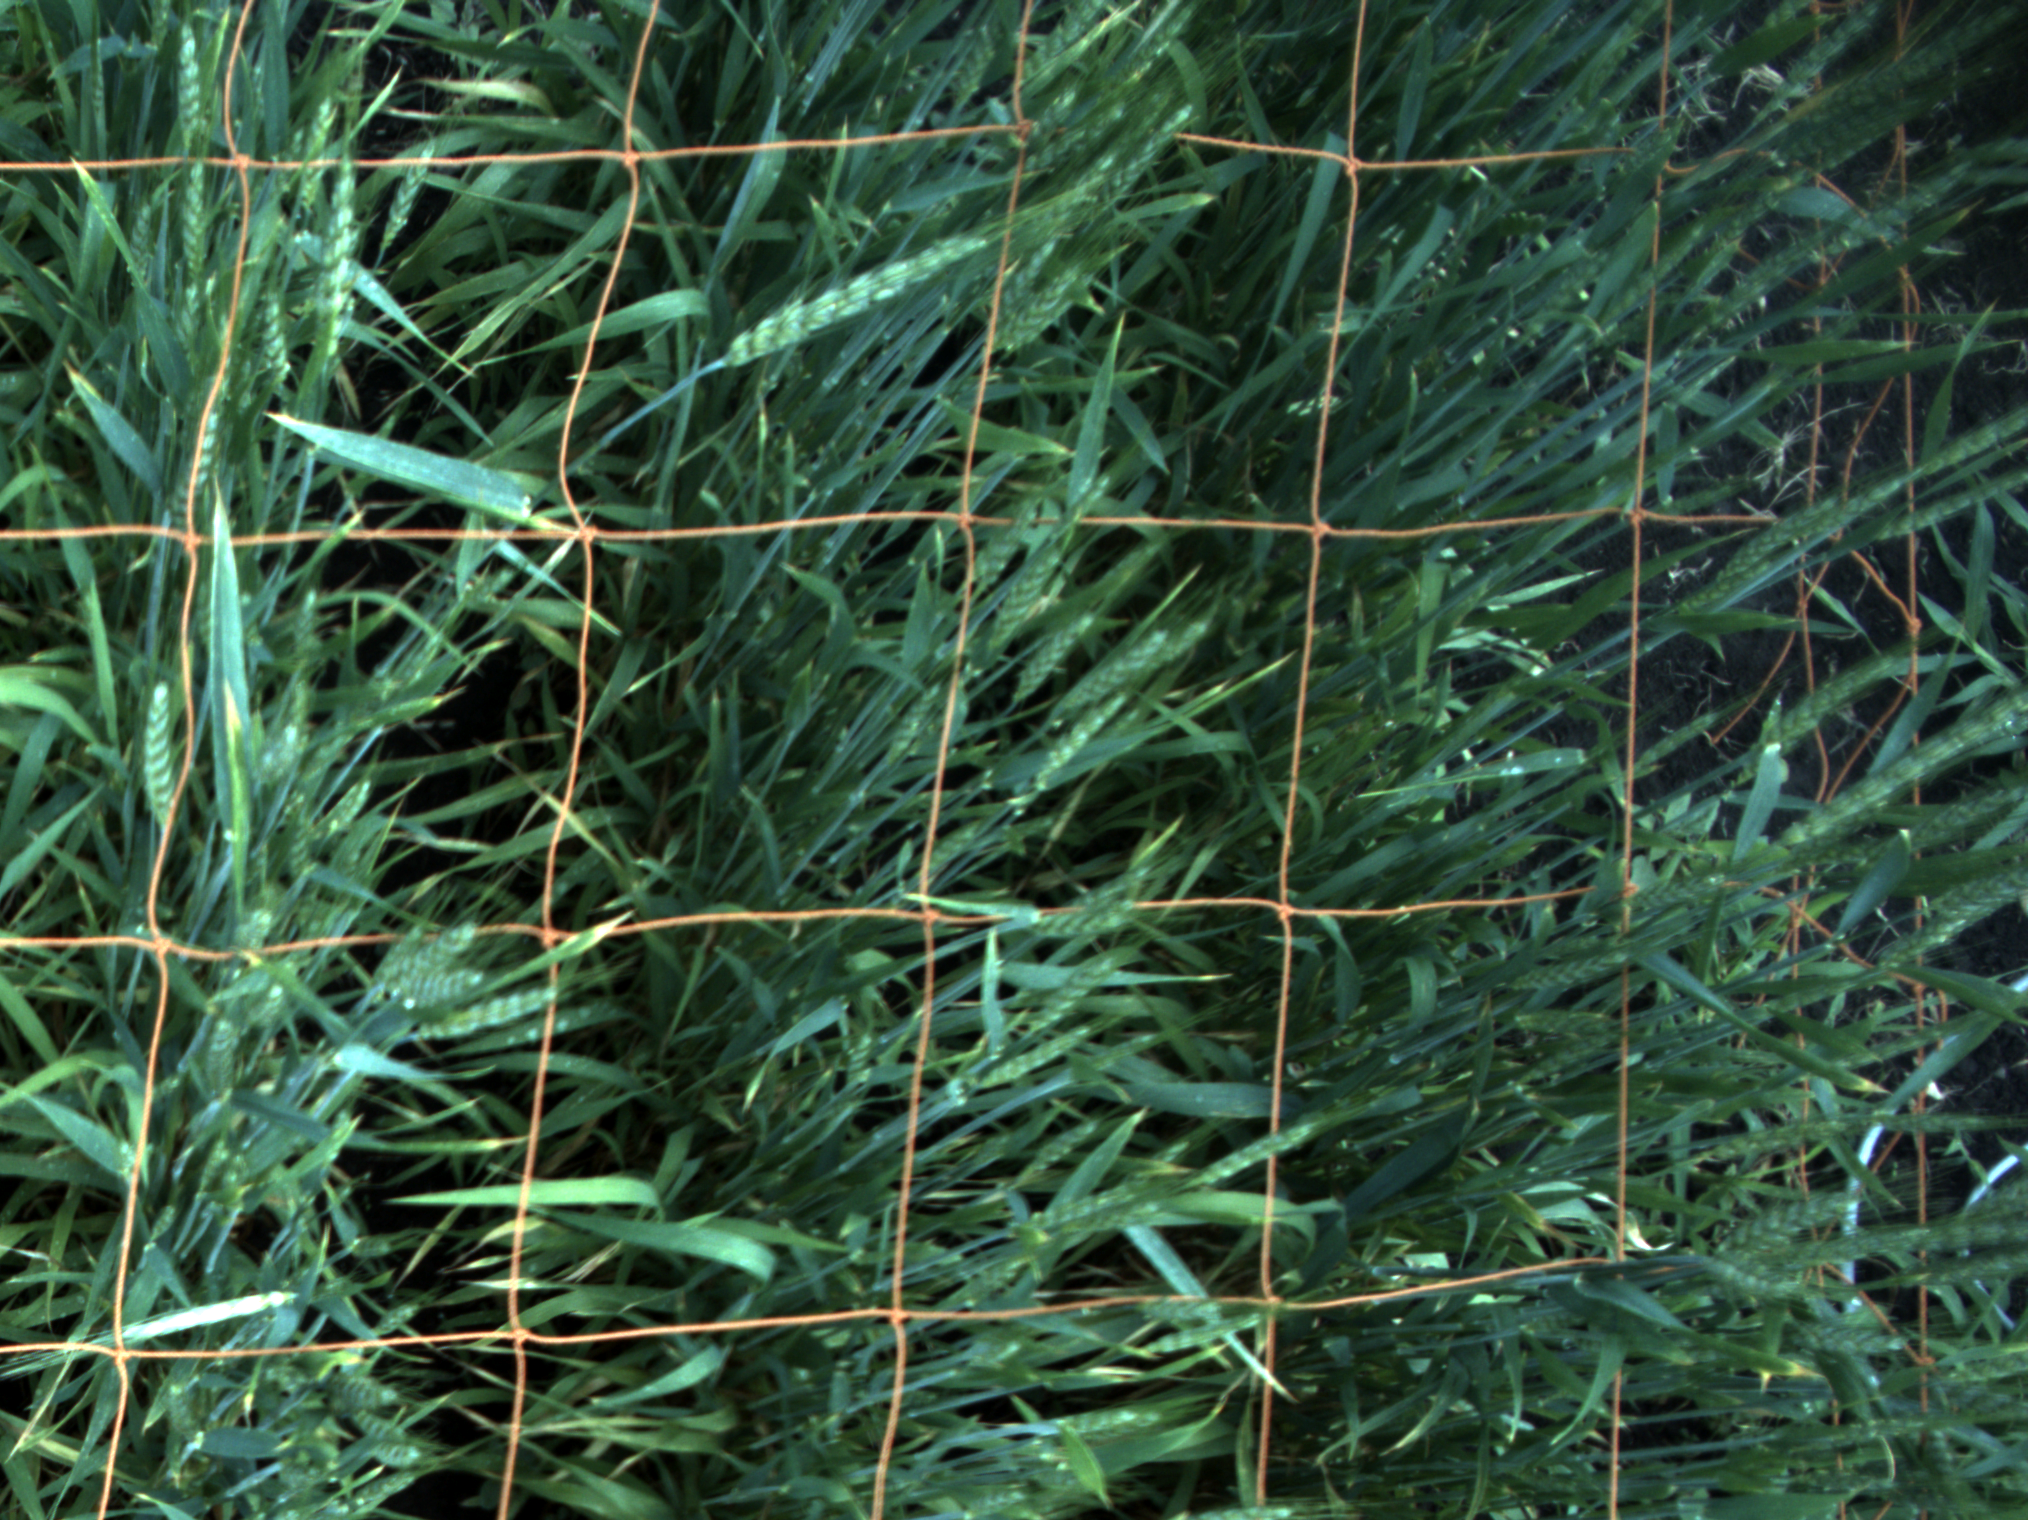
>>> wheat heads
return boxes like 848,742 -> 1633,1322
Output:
1513,1011 -> 1607,1036
1132,1140 -> 1192,1189
1679,212 -> 1747,273
1992,1475 -> 2028,1493
964,1489 -> 1025,1516
1743,169 -> 1807,222
1496,211 -> 1546,239
985,262 -> 1079,354
1716,496 -> 1836,582
311,778 -> 372,840
1743,1226 -> 1931,1276
370,1441 -> 422,1467
232,921 -> 249,951
1080,1413 -> 1163,1440
262,721 -> 303,783
237,1269 -> 309,1349
1876,875 -> 2017,964
1031,1185 -> 1126,1227
1688,240 -> 1809,341
206,1024 -> 222,1093
175,282 -> 200,361
988,547 -> 1061,648
1061,1410 -> 1138,1430
1840,1419 -> 1925,1446
1795,797 -> 1890,852
1507,947 -> 1628,995
1026,953 -> 1116,1032
150,2 -> 171,46
1834,1029 -> 1946,1070
1801,1467 -> 1877,1490
347,1234 -> 391,1258
846,1031 -> 874,1084
1616,873 -> 1725,914
293,890 -> 318,930
972,1027 -> 1090,1090
297,178 -> 317,211
1111,103 -> 1195,193
288,680 -> 308,734
969,1134 -> 1009,1162
1034,691 -> 1127,780
1875,473 -> 2025,539
303,94 -> 332,160
1757,1 -> 1807,28
324,1109 -> 352,1161
1615,0 -> 1664,40
369,923 -> 425,985
217,1512 -> 267,1520
380,922 -> 479,990
1528,1314 -> 1589,1330
147,1204 -> 175,1241
279,795 -> 306,822
977,510 -> 1039,584
1046,791 -> 1083,847
166,1382 -> 198,1437
290,824 -> 311,880
1105,543 -> 1159,582
1018,0 -> 1104,81
1632,713 -> 1716,773
143,681 -> 174,813
412,988 -> 557,1044
1622,117 -> 1689,175
1713,1121 -> 1853,1161
315,149 -> 357,357
329,1371 -> 400,1408
1570,1334 -> 1605,1353
1773,103 -> 1910,162
1519,1030 -> 1620,1084
1931,1215 -> 2027,1247
1600,222 -> 1702,327
1186,1121 -> 1318,1190
246,908 -> 275,949
1799,6 -> 2014,124
1881,1110 -> 1988,1136
128,202 -> 151,263
399,628 -> 443,686
1169,1507 -> 1293,1520
1907,787 -> 2016,847
1777,690 -> 2027,845
303,731 -> 354,777
264,1506 -> 301,1520
1093,1033 -> 1156,1066
1097,4 -> 1195,103
1515,1467 -> 1579,1493
267,980 -> 284,1021
1062,1203 -> 1162,1235
1759,3 -> 1880,115
1733,655 -> 1896,785
1014,1120 -> 1096,1186
954,1 -> 1016,104
1823,160 -> 1975,256
1020,106 -> 1124,177
209,1152 -> 244,1211
245,852 -> 267,883
312,1280 -> 345,1302
92,36 -> 103,116
1926,1426 -> 1956,1476
1676,560 -> 1774,611
1541,934 -> 1597,961
1073,473 -> 1110,523
1922,870 -> 1995,914
1776,837 -> 1894,875
1586,39 -> 1630,97
968,520 -> 1016,579
254,292 -> 290,380
198,576 -> 215,647
219,1021 -> 236,1090
1570,135 -> 1615,184
168,410 -> 218,533
280,1462 -> 320,1488
1808,474 -> 1905,535
1463,674 -> 1520,725
1023,89 -> 1077,150
179,19 -> 199,134
1896,1249 -> 2027,1287
1010,614 -> 1094,705
969,1342 -> 1020,1368
1134,1298 -> 1224,1322
1938,1355 -> 2026,1383
1713,1191 -> 1847,1263
1525,252 -> 1606,333
198,1139 -> 229,1191
471,570 -> 517,600
278,129 -> 304,186
1965,1182 -> 2026,1220
1009,815 -> 1055,844
924,819 -> 979,876
1025,1450 -> 1085,1491
376,1302 -> 422,1334
353,1406 -> 406,1444
273,1363 -> 312,1395
1901,406 -> 2023,481
1786,1316 -> 1910,1353
411,965 -> 486,1010
119,1139 -> 138,1179
1072,864 -> 1151,906
227,341 -> 254,415
182,161 -> 206,281
724,231 -> 987,368
1033,907 -> 1129,938
295,587 -> 318,652
963,1258 -> 1023,1299
350,1471 -> 416,1505
1702,1258 -> 1798,1298
1020,194 -> 1100,233
1056,144 -> 1129,228
1148,619 -> 1208,668
1145,1312 -> 1262,1353
887,682 -> 938,762
996,238 -> 1056,313
1051,629 -> 1168,716
337,847 -> 361,878
251,63 -> 267,120
181,389 -> 205,454
1100,708 -> 1138,739
377,145 -> 436,248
